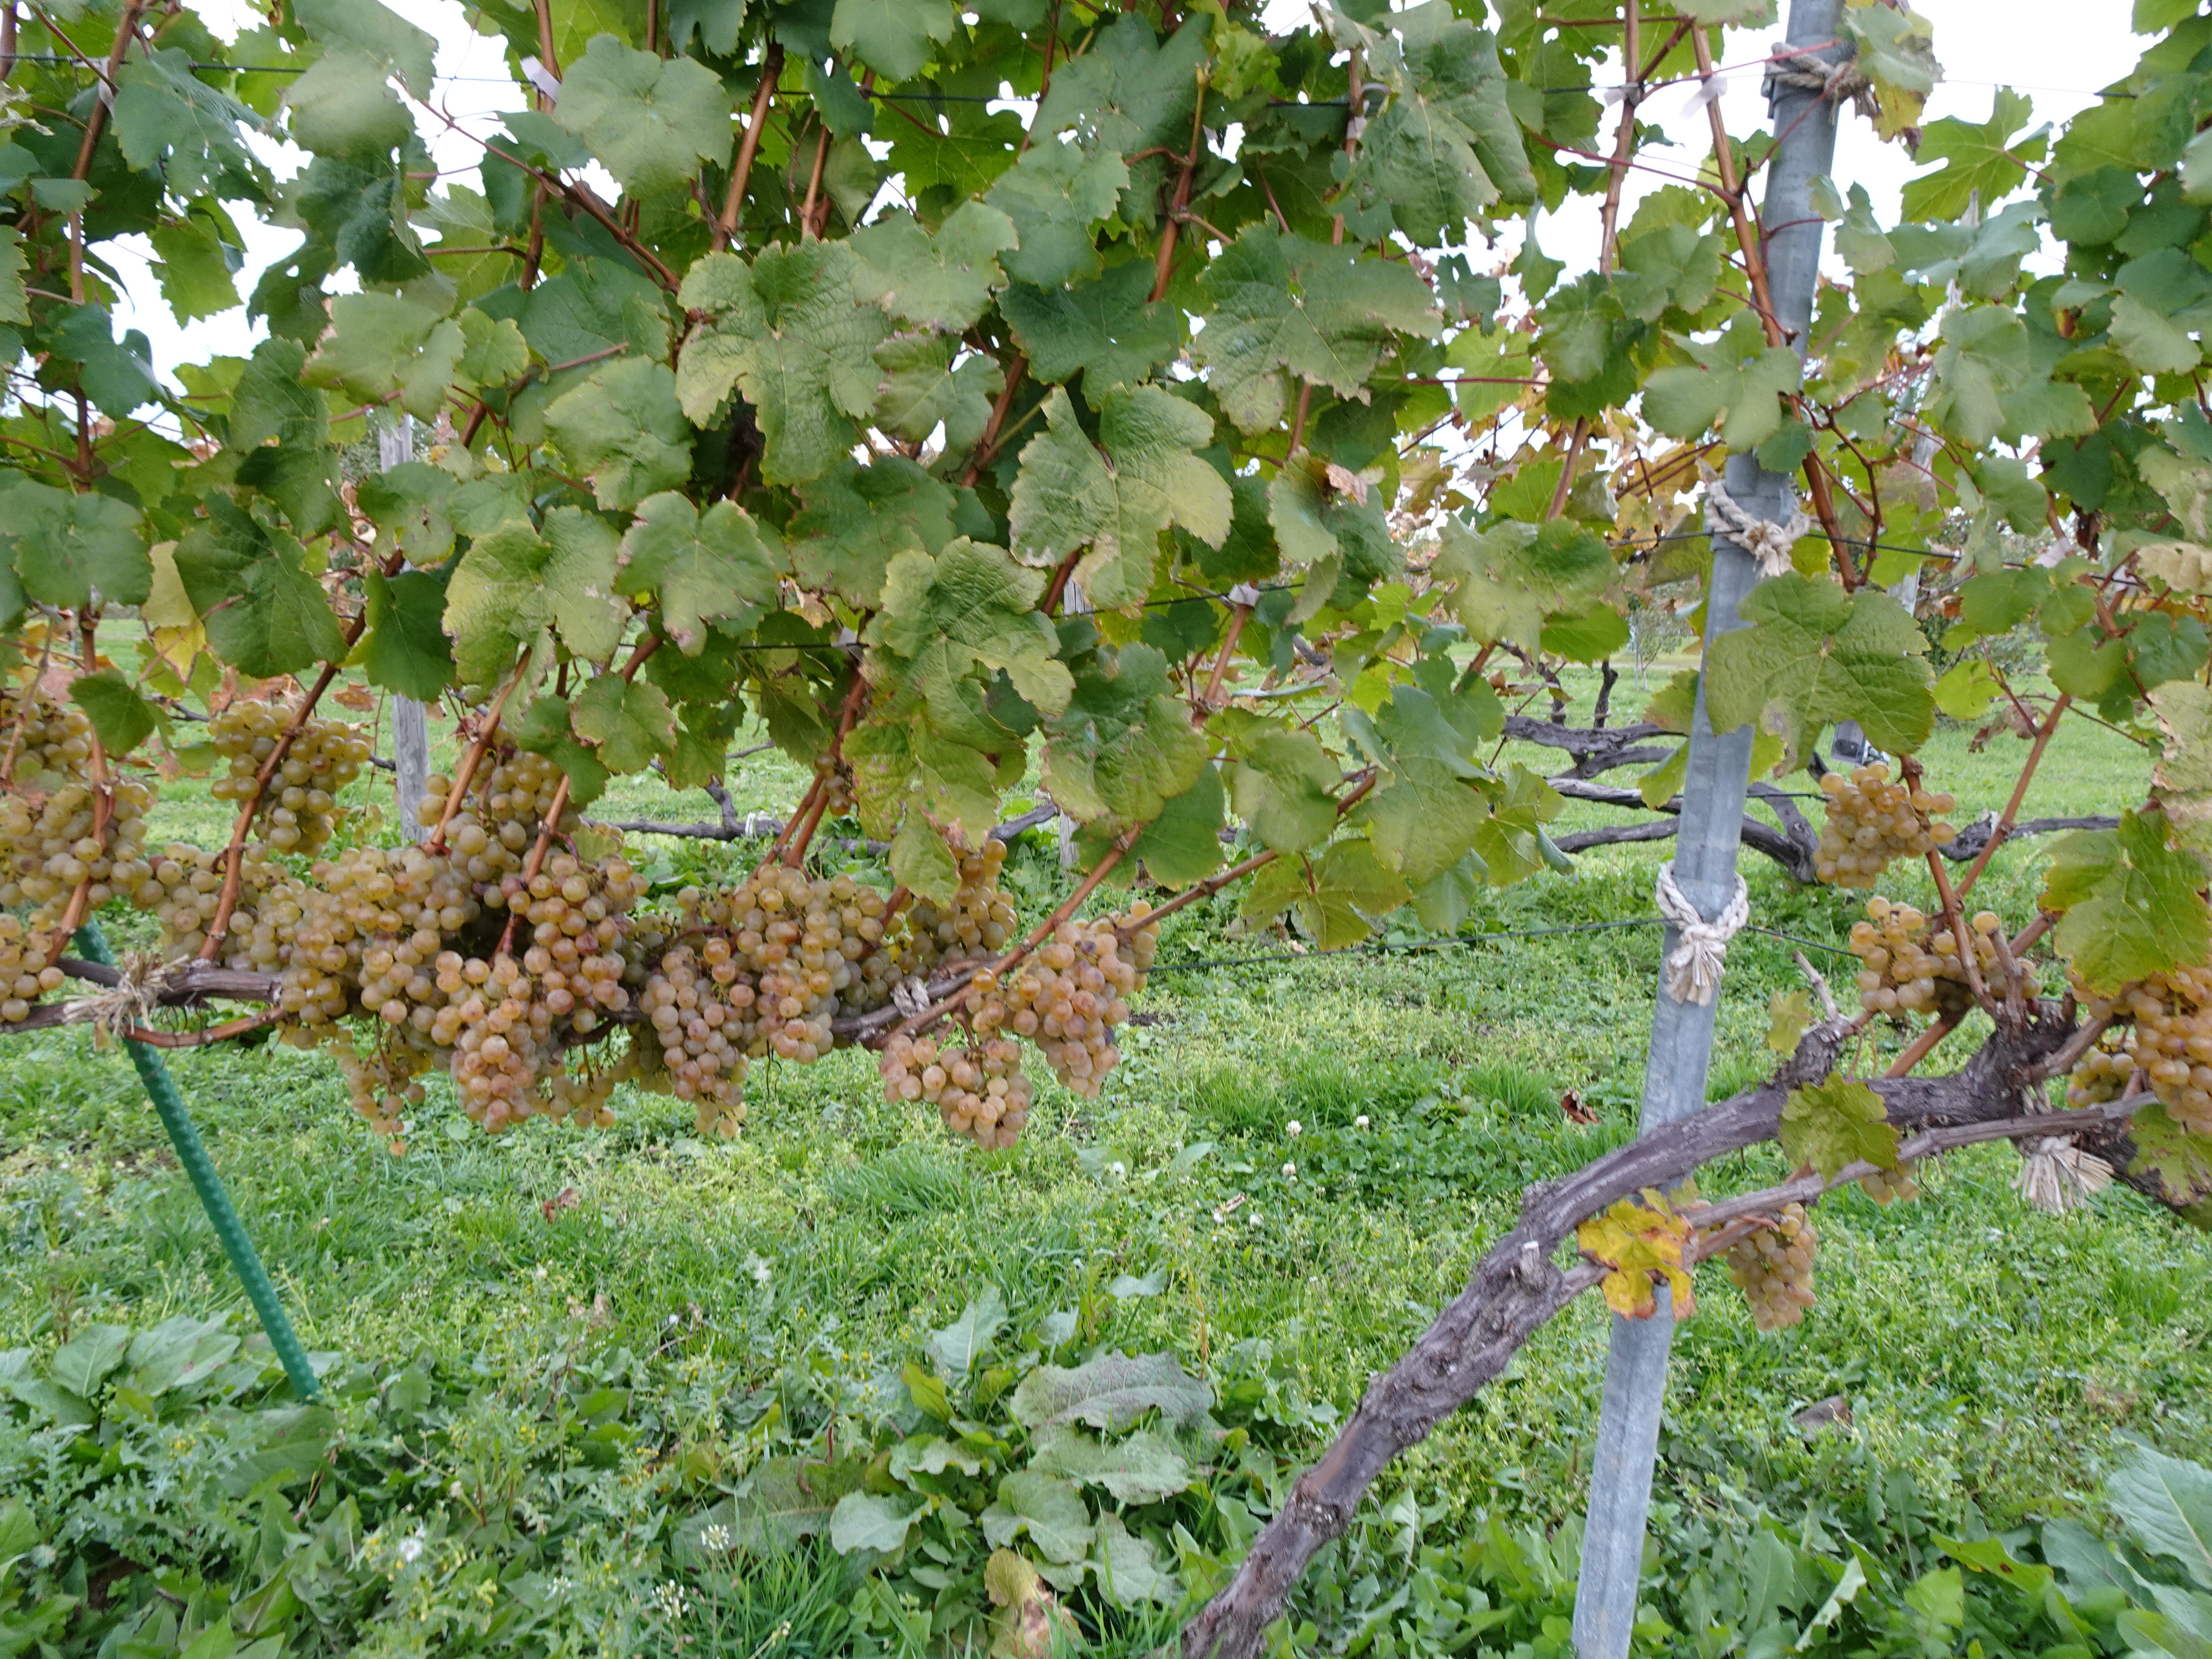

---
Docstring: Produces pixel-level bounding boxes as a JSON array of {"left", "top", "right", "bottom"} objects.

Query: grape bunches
[
  {"left": 674, "top": 886, "right": 771, "bottom": 1059},
  {"left": 938, "top": 1026, "right": 1034, "bottom": 1147},
  {"left": 416, "top": 774, "right": 540, "bottom": 909},
  {"left": 0, "top": 684, "right": 91, "bottom": 784},
  {"left": 206, "top": 698, "right": 371, "bottom": 857},
  {"left": 1926, "top": 911, "right": 2042, "bottom": 1011},
  {"left": 1861, "top": 1158, "right": 1923, "bottom": 1204},
  {"left": 1073, "top": 900, "right": 1161, "bottom": 993},
  {"left": 27, "top": 783, "right": 152, "bottom": 934},
  {"left": 597, "top": 858, "right": 649, "bottom": 914},
  {"left": 1715, "top": 1199, "right": 1817, "bottom": 1329},
  {"left": 612, "top": 908, "right": 681, "bottom": 1096},
  {"left": 522, "top": 846, "right": 629, "bottom": 1033},
  {"left": 878, "top": 1033, "right": 948, "bottom": 1103},
  {"left": 548, "top": 1062, "right": 636, "bottom": 1128},
  {"left": 965, "top": 967, "right": 1040, "bottom": 1037},
  {"left": 1847, "top": 894, "right": 1943, "bottom": 1022},
  {"left": 729, "top": 864, "right": 887, "bottom": 1066},
  {"left": 452, "top": 720, "right": 587, "bottom": 825},
  {"left": 905, "top": 838, "right": 1019, "bottom": 969},
  {"left": 0, "top": 793, "right": 69, "bottom": 909},
  {"left": 999, "top": 919, "right": 1135, "bottom": 1101},
  {"left": 2066, "top": 1028, "right": 2132, "bottom": 1108},
  {"left": 2062, "top": 957, "right": 2140, "bottom": 1021},
  {"left": 592, "top": 822, "right": 623, "bottom": 854},
  {"left": 431, "top": 950, "right": 565, "bottom": 1134},
  {"left": 129, "top": 840, "right": 238, "bottom": 973},
  {"left": 259, "top": 844, "right": 400, "bottom": 1050},
  {"left": 2131, "top": 958, "right": 2212, "bottom": 1139},
  {"left": 230, "top": 842, "right": 306, "bottom": 973},
  {"left": 829, "top": 912, "right": 931, "bottom": 1049},
  {"left": 311, "top": 1015, "right": 432, "bottom": 1156},
  {"left": 1809, "top": 757, "right": 1958, "bottom": 890},
  {"left": 811, "top": 751, "right": 862, "bottom": 817},
  {"left": 355, "top": 845, "right": 480, "bottom": 1032},
  {"left": 0, "top": 912, "right": 65, "bottom": 1024},
  {"left": 638, "top": 938, "right": 749, "bottom": 1141}
]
